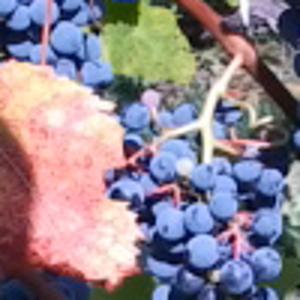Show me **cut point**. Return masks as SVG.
<instances>
[{
  "mask_svg": "<svg viewBox=\"0 0 300 300\" xmlns=\"http://www.w3.org/2000/svg\"><path fill=\"white\" fill-rule=\"evenodd\" d=\"M242 66L233 58L231 66L226 71L219 82H216L208 92L207 101L201 118L197 121L180 126L178 133L180 135H188L201 130L202 145L201 154L205 162H211L214 159V149L232 156L233 158H240L242 151L236 147L225 144L224 142L214 138L213 116L215 112V105L223 98L228 86L233 81Z\"/></svg>",
  "mask_w": 300,
  "mask_h": 300,
  "instance_id": "6a23745f",
  "label": "cut point"
}]
</instances>
